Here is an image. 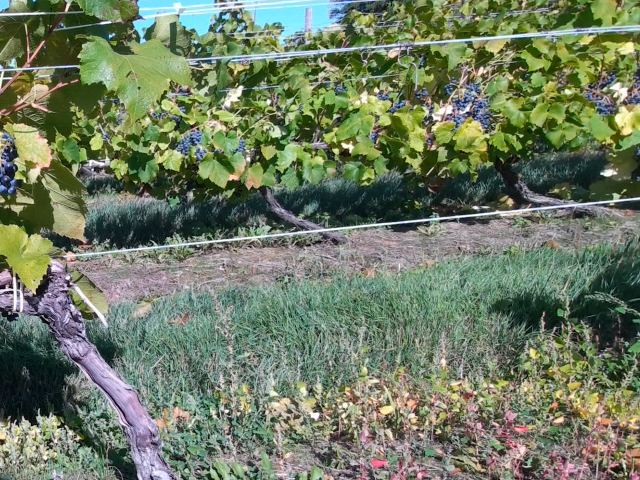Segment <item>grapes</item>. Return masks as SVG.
Instances as JSON below:
<instances>
[{
  "instance_id": "1",
  "label": "grapes",
  "mask_w": 640,
  "mask_h": 480,
  "mask_svg": "<svg viewBox=\"0 0 640 480\" xmlns=\"http://www.w3.org/2000/svg\"><path fill=\"white\" fill-rule=\"evenodd\" d=\"M2 138H5L6 141L9 142V146H5L1 154V159L6 162L0 167V192L15 195L16 186L18 185L15 174L18 171V166L12 164V162L19 157V154L17 153L15 143H12L13 137L10 136L9 133H2Z\"/></svg>"
}]
</instances>
